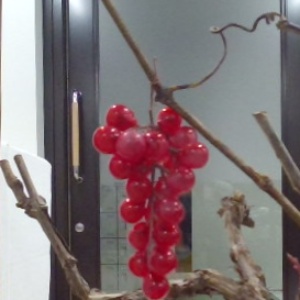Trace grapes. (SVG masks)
<instances>
[{
    "instance_id": "grapes-1",
    "label": "grapes",
    "mask_w": 300,
    "mask_h": 300,
    "mask_svg": "<svg viewBox=\"0 0 300 300\" xmlns=\"http://www.w3.org/2000/svg\"><path fill=\"white\" fill-rule=\"evenodd\" d=\"M159 125L136 122L124 103L107 111L105 125L92 133V147L110 154L109 173L125 179L128 198L119 206L124 223L135 224L128 232L137 250L128 260L135 277L145 278L143 293L159 300L170 290L167 273L178 267L171 246L181 240L179 221L186 211L178 197L195 185L192 169L204 167L209 150L197 139V130L181 127L183 117L166 106L158 112Z\"/></svg>"
}]
</instances>
